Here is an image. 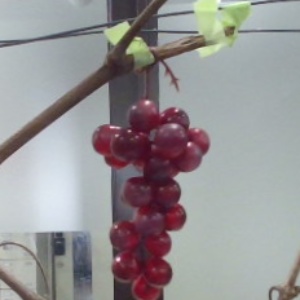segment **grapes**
Returning a JSON list of instances; mask_svg holds the SVG:
<instances>
[{"label":"grapes","mask_w":300,"mask_h":300,"mask_svg":"<svg viewBox=\"0 0 300 300\" xmlns=\"http://www.w3.org/2000/svg\"><path fill=\"white\" fill-rule=\"evenodd\" d=\"M129 126L102 124L92 131L90 145L106 163L126 169L131 162L143 171L127 179L123 197L139 208L132 220L121 221L110 240L123 251L112 261L114 275L131 283L135 300H158L160 289L173 279V268L162 257L173 249L168 232L187 223L188 211L179 203L182 185L174 177L192 172L210 149V136L190 128L182 107L159 111L154 100L141 97L127 112Z\"/></svg>","instance_id":"01657485"}]
</instances>
